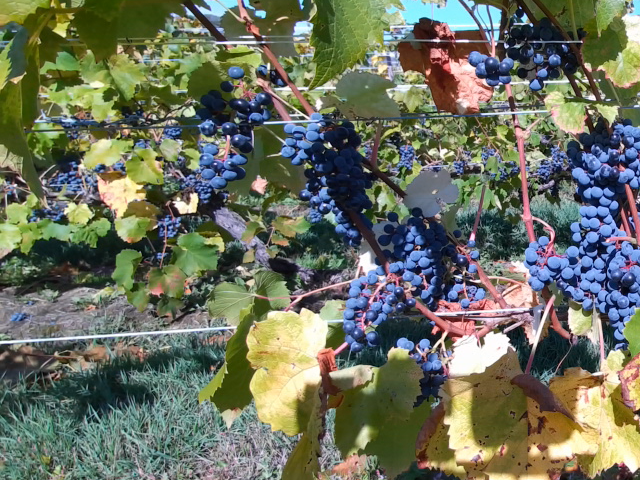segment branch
Returning a JSON list of instances; mask_svg holds the SVG:
<instances>
[{"label":"branch","mask_w":640,"mask_h":480,"mask_svg":"<svg viewBox=\"0 0 640 480\" xmlns=\"http://www.w3.org/2000/svg\"><path fill=\"white\" fill-rule=\"evenodd\" d=\"M364 165L379 179V181L383 185H385L388 189L393 191L396 195L400 197H405L407 195V192L405 190L398 188L394 183L389 181L385 177V175L381 173V171L370 160H366L364 162Z\"/></svg>","instance_id":"ca6c30ca"},{"label":"branch","mask_w":640,"mask_h":480,"mask_svg":"<svg viewBox=\"0 0 640 480\" xmlns=\"http://www.w3.org/2000/svg\"><path fill=\"white\" fill-rule=\"evenodd\" d=\"M533 3L545 12L549 21L552 23V25L557 30V32L562 37H564L565 40L572 39L571 34L563 28V26L559 23L553 11L550 9V7L546 3H544L542 0H533Z\"/></svg>","instance_id":"ea751061"},{"label":"branch","mask_w":640,"mask_h":480,"mask_svg":"<svg viewBox=\"0 0 640 480\" xmlns=\"http://www.w3.org/2000/svg\"><path fill=\"white\" fill-rule=\"evenodd\" d=\"M348 217L352 220V222L356 225V227L361 231L362 235L365 237L367 243L370 246V249L374 252L376 257L383 263H387L389 258L383 254L382 248L376 243L374 240L372 233L366 226L359 220L358 216L354 212H350Z\"/></svg>","instance_id":"45aa463d"},{"label":"branch","mask_w":640,"mask_h":480,"mask_svg":"<svg viewBox=\"0 0 640 480\" xmlns=\"http://www.w3.org/2000/svg\"><path fill=\"white\" fill-rule=\"evenodd\" d=\"M273 105L275 106L278 113L282 116L284 120H291V116L287 113V111L283 108L282 104L277 98L272 100Z\"/></svg>","instance_id":"419ea82b"},{"label":"branch","mask_w":640,"mask_h":480,"mask_svg":"<svg viewBox=\"0 0 640 480\" xmlns=\"http://www.w3.org/2000/svg\"><path fill=\"white\" fill-rule=\"evenodd\" d=\"M570 48L573 50V52L575 53V56L578 60V63L580 65V67L582 68L583 73L585 74L586 78L588 79L589 85L592 89V91L594 92V94L596 95V98L599 102H602L604 100V95L602 93V91L599 89L595 77L593 76L592 72L589 69V66L587 65V63H584L582 61L581 55H580V48L576 45H570Z\"/></svg>","instance_id":"982ccf7c"},{"label":"branch","mask_w":640,"mask_h":480,"mask_svg":"<svg viewBox=\"0 0 640 480\" xmlns=\"http://www.w3.org/2000/svg\"><path fill=\"white\" fill-rule=\"evenodd\" d=\"M618 213H619L620 222L622 223L624 228L625 235L628 239H631L633 237V232L631 230L630 222L626 217L625 208L623 206H620L618 208Z\"/></svg>","instance_id":"a944a4c4"},{"label":"branch","mask_w":640,"mask_h":480,"mask_svg":"<svg viewBox=\"0 0 640 480\" xmlns=\"http://www.w3.org/2000/svg\"><path fill=\"white\" fill-rule=\"evenodd\" d=\"M237 8L239 9V12L241 14L242 19L245 21V23L248 25L249 30L251 31V33L253 34V37L256 40H263V37L261 36L259 30L257 29L255 23L252 21V19L250 18V16L248 15V12L246 10V6L243 3H239L237 5Z\"/></svg>","instance_id":"2b1400db"},{"label":"branch","mask_w":640,"mask_h":480,"mask_svg":"<svg viewBox=\"0 0 640 480\" xmlns=\"http://www.w3.org/2000/svg\"><path fill=\"white\" fill-rule=\"evenodd\" d=\"M567 81H568V83H569V85H570V87H571V89H572V91L574 93L575 98L577 100H580L582 98V93H581V91H580V89H579L574 77L572 75H569L567 77Z\"/></svg>","instance_id":"725ea6d5"},{"label":"branch","mask_w":640,"mask_h":480,"mask_svg":"<svg viewBox=\"0 0 640 480\" xmlns=\"http://www.w3.org/2000/svg\"><path fill=\"white\" fill-rule=\"evenodd\" d=\"M504 87H505V92L507 94V97L509 99L510 109L511 110H516L517 109V102H516L515 94H514L513 89H512V84L510 82H506L504 84Z\"/></svg>","instance_id":"afce2bb1"},{"label":"branch","mask_w":640,"mask_h":480,"mask_svg":"<svg viewBox=\"0 0 640 480\" xmlns=\"http://www.w3.org/2000/svg\"><path fill=\"white\" fill-rule=\"evenodd\" d=\"M548 310H549V315L551 317L556 334L560 337L570 340L572 338V334L562 329V326L560 325V320L556 313V307L554 305H550L548 307Z\"/></svg>","instance_id":"8bde2521"},{"label":"branch","mask_w":640,"mask_h":480,"mask_svg":"<svg viewBox=\"0 0 640 480\" xmlns=\"http://www.w3.org/2000/svg\"><path fill=\"white\" fill-rule=\"evenodd\" d=\"M513 128L516 135L517 147H518V160L520 168V185L523 194V207H524V219L526 221L528 237L531 242L536 240L534 222L531 217V205H530V192L527 183V166L525 158V145L522 129L520 126V119L517 115L512 117Z\"/></svg>","instance_id":"30e6481e"},{"label":"branch","mask_w":640,"mask_h":480,"mask_svg":"<svg viewBox=\"0 0 640 480\" xmlns=\"http://www.w3.org/2000/svg\"><path fill=\"white\" fill-rule=\"evenodd\" d=\"M261 50L270 58L272 64L274 65L277 72L279 73V76L286 83V85L291 89L295 99L298 101L301 107L310 115H314L316 113V110L312 106H310L302 97L301 92L298 89L297 85L286 74V71L283 68V65L280 63L276 54L268 46H262Z\"/></svg>","instance_id":"325d2c04"},{"label":"branch","mask_w":640,"mask_h":480,"mask_svg":"<svg viewBox=\"0 0 640 480\" xmlns=\"http://www.w3.org/2000/svg\"><path fill=\"white\" fill-rule=\"evenodd\" d=\"M414 307H415V311L417 313H423L427 319L434 320L438 325H440L443 328H445L451 334H453V335H462V336H464L466 338H470L472 336V333L469 330H467L465 328L453 327L450 323H448L447 321H445L441 317H438L436 315V313L430 312L426 307H422V304L420 302H416L414 304Z\"/></svg>","instance_id":"170604dd"},{"label":"branch","mask_w":640,"mask_h":480,"mask_svg":"<svg viewBox=\"0 0 640 480\" xmlns=\"http://www.w3.org/2000/svg\"><path fill=\"white\" fill-rule=\"evenodd\" d=\"M476 273L479 276V278L481 279L482 283L485 285L487 291L490 293V295L499 303L501 308H507L508 304L505 301L504 297L502 295H500L495 288L493 287L491 281L489 280L488 276L485 274L484 270L481 267H478L476 269Z\"/></svg>","instance_id":"1d269e1b"},{"label":"branch","mask_w":640,"mask_h":480,"mask_svg":"<svg viewBox=\"0 0 640 480\" xmlns=\"http://www.w3.org/2000/svg\"><path fill=\"white\" fill-rule=\"evenodd\" d=\"M517 4L525 12V14L527 15L528 19L532 24H536L538 22V19L535 17L534 13L530 9V7L524 2V0H517Z\"/></svg>","instance_id":"46de074c"},{"label":"branch","mask_w":640,"mask_h":480,"mask_svg":"<svg viewBox=\"0 0 640 480\" xmlns=\"http://www.w3.org/2000/svg\"><path fill=\"white\" fill-rule=\"evenodd\" d=\"M623 191L625 192L628 202H629V209L631 211V216L633 219V223L635 226V234L637 236L636 238V244L638 246H640V217L638 214V209L636 206V200H635V196L630 188V186L628 184H625L623 186Z\"/></svg>","instance_id":"1ff4a987"},{"label":"branch","mask_w":640,"mask_h":480,"mask_svg":"<svg viewBox=\"0 0 640 480\" xmlns=\"http://www.w3.org/2000/svg\"><path fill=\"white\" fill-rule=\"evenodd\" d=\"M500 16H501V18H500V22H499V29H498L497 39H504L507 20H508V13L506 11H502L500 13Z\"/></svg>","instance_id":"7c5c6f52"},{"label":"branch","mask_w":640,"mask_h":480,"mask_svg":"<svg viewBox=\"0 0 640 480\" xmlns=\"http://www.w3.org/2000/svg\"><path fill=\"white\" fill-rule=\"evenodd\" d=\"M188 10L190 12H192L193 14H195L207 26V28L210 30L211 34L217 40H226L227 39V37L225 35H223L220 32H218V29L213 24V22L209 18H207L195 5H190L188 7Z\"/></svg>","instance_id":"1af6ec82"}]
</instances>
